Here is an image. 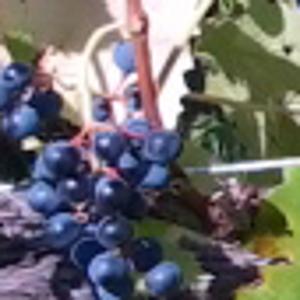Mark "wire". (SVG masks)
<instances>
[{
	"label": "wire",
	"instance_id": "1",
	"mask_svg": "<svg viewBox=\"0 0 300 300\" xmlns=\"http://www.w3.org/2000/svg\"><path fill=\"white\" fill-rule=\"evenodd\" d=\"M300 157H284L278 159H266L241 163L217 164L213 167L183 165V174L217 176L224 174L259 173L281 170H299Z\"/></svg>",
	"mask_w": 300,
	"mask_h": 300
}]
</instances>
